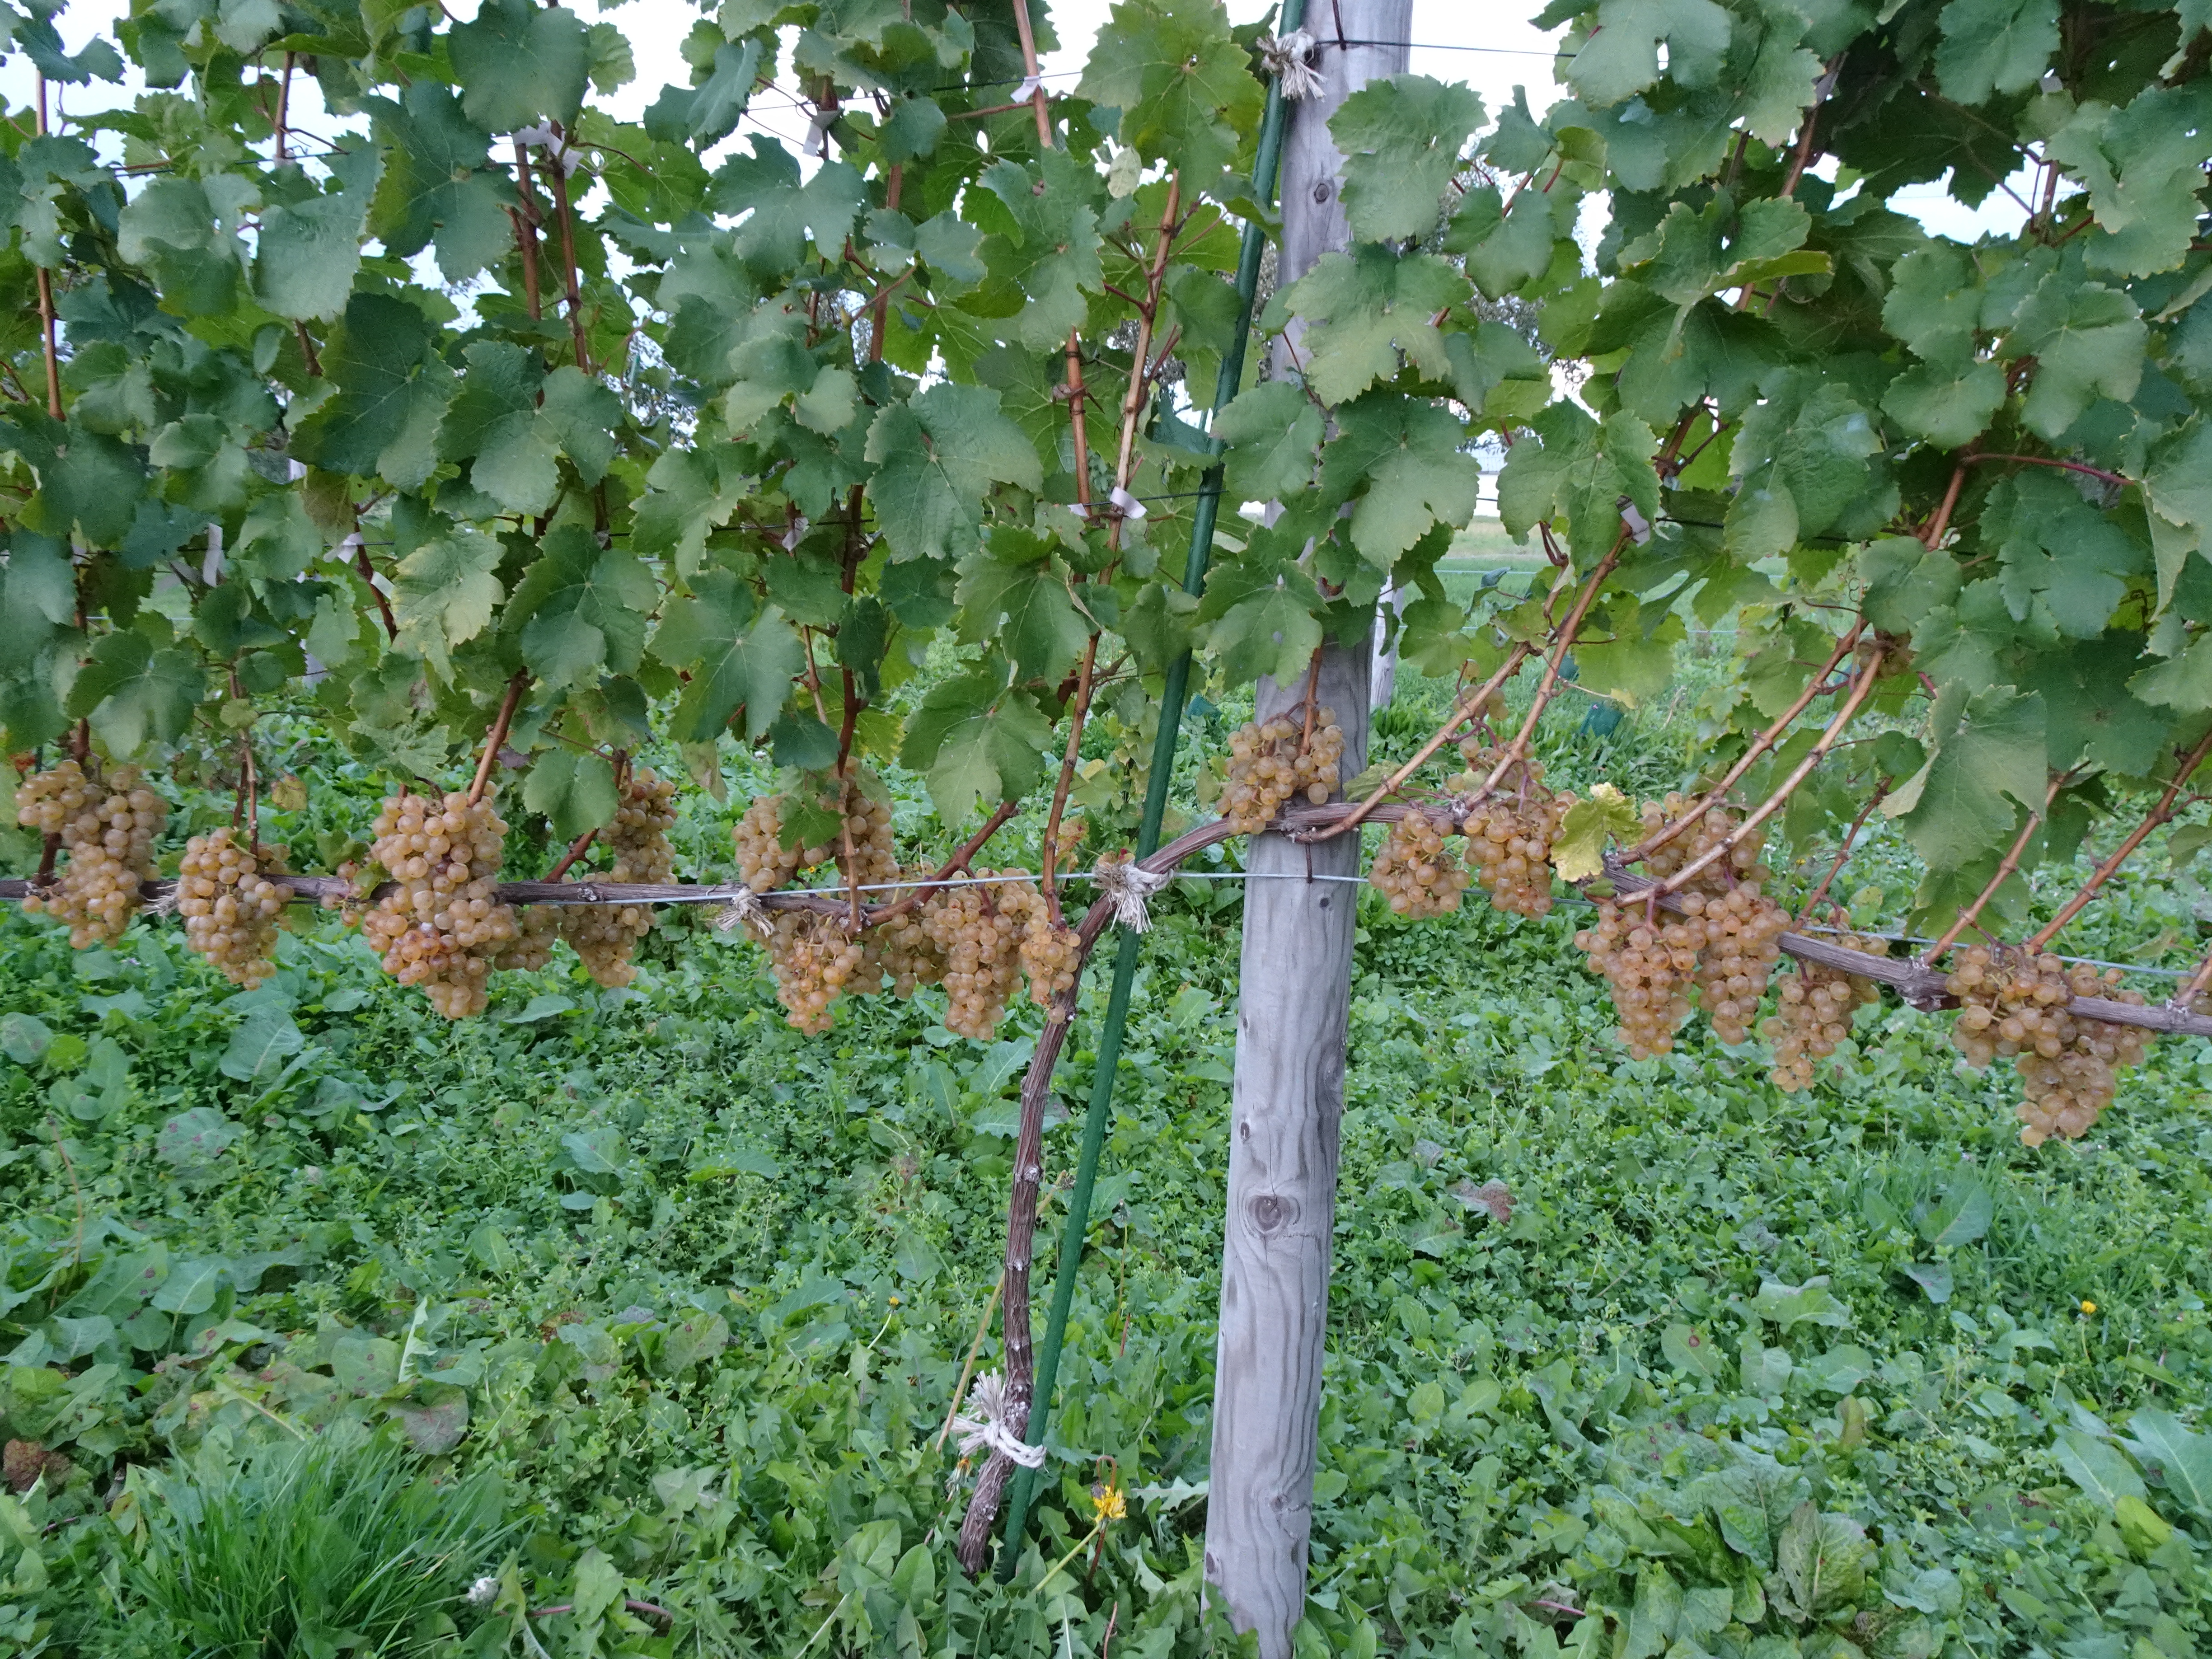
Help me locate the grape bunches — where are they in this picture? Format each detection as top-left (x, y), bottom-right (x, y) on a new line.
top-left (176, 826), bottom-right (295, 990)
top-left (879, 862), bottom-right (950, 1000)
top-left (362, 885), bottom-right (492, 1017)
top-left (1017, 906), bottom-right (1083, 1024)
top-left (320, 860), bottom-right (378, 928)
top-left (923, 865), bottom-right (1048, 1042)
top-left (816, 756), bottom-right (900, 893)
top-left (1462, 782), bottom-right (1578, 921)
top-left (1369, 808), bottom-right (1472, 920)
top-left (1573, 903), bottom-right (1708, 1061)
top-left (1944, 939), bottom-right (2075, 1069)
top-left (1215, 704), bottom-right (1344, 836)
top-left (731, 792), bottom-right (829, 896)
top-left (1856, 627), bottom-right (1915, 677)
top-left (597, 765), bottom-right (678, 886)
top-left (13, 759), bottom-right (87, 833)
top-left (560, 864), bottom-right (654, 987)
top-left (743, 909), bottom-right (865, 976)
top-left (2015, 962), bottom-right (2157, 1148)
top-left (770, 976), bottom-right (864, 1039)
top-left (1681, 880), bottom-right (1793, 1044)
top-left (1638, 792), bottom-right (1772, 913)
top-left (1762, 963), bottom-right (1878, 1091)
top-left (22, 840), bottom-right (142, 950)
top-left (1446, 659), bottom-right (1545, 793)
top-left (494, 901), bottom-right (563, 971)
top-left (71, 755), bottom-right (167, 887)
top-left (1789, 907), bottom-right (1887, 1009)
top-left (370, 780), bottom-right (520, 952)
